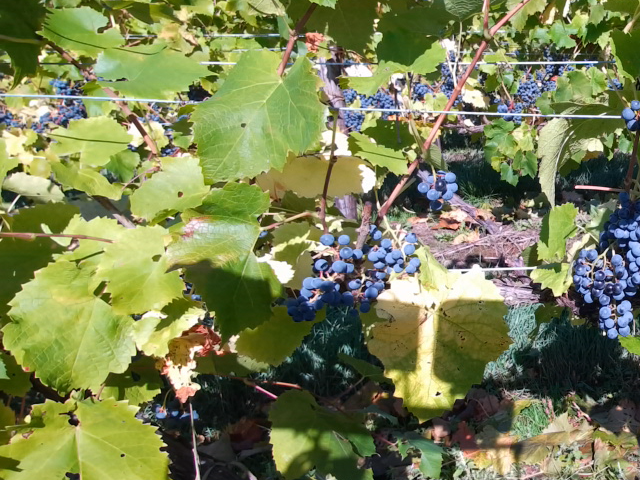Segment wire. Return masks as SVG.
Wrapping results in <instances>:
<instances>
[{
	"label": "wire",
	"mask_w": 640,
	"mask_h": 480,
	"mask_svg": "<svg viewBox=\"0 0 640 480\" xmlns=\"http://www.w3.org/2000/svg\"><path fill=\"white\" fill-rule=\"evenodd\" d=\"M329 110H343L352 112H404L415 116H438V115H457L468 117H534L546 118L552 120H570V119H621V114H568L554 115L548 113L536 112H471L460 110H436V111H417L406 107H354L345 105H329Z\"/></svg>",
	"instance_id": "d2f4af69"
},
{
	"label": "wire",
	"mask_w": 640,
	"mask_h": 480,
	"mask_svg": "<svg viewBox=\"0 0 640 480\" xmlns=\"http://www.w3.org/2000/svg\"><path fill=\"white\" fill-rule=\"evenodd\" d=\"M20 98V99H50V100H92V101H104V102H120V103H130V104H138V103H152V104H190V105H200V100H192V99H154V98H122V97H107V96H94L87 94H76V95H52L46 94L43 92H38L36 94H22L15 92H6L0 93V98Z\"/></svg>",
	"instance_id": "a73af890"
}]
</instances>
